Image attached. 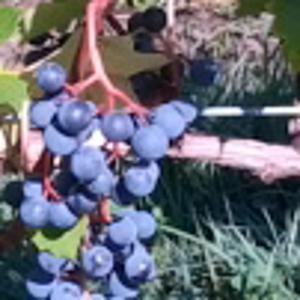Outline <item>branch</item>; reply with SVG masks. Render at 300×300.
I'll use <instances>...</instances> for the list:
<instances>
[{
  "label": "branch",
  "mask_w": 300,
  "mask_h": 300,
  "mask_svg": "<svg viewBox=\"0 0 300 300\" xmlns=\"http://www.w3.org/2000/svg\"><path fill=\"white\" fill-rule=\"evenodd\" d=\"M92 2L94 4H98L95 7V15L97 16V20L94 36L99 38L103 31L104 13L110 9V5L113 3V0H87L85 4L80 32L81 45L69 76V83L71 85L81 82L86 76L93 74V69L90 64V42L88 41L89 33L86 26L88 7L92 4Z\"/></svg>",
  "instance_id": "branch-1"
}]
</instances>
